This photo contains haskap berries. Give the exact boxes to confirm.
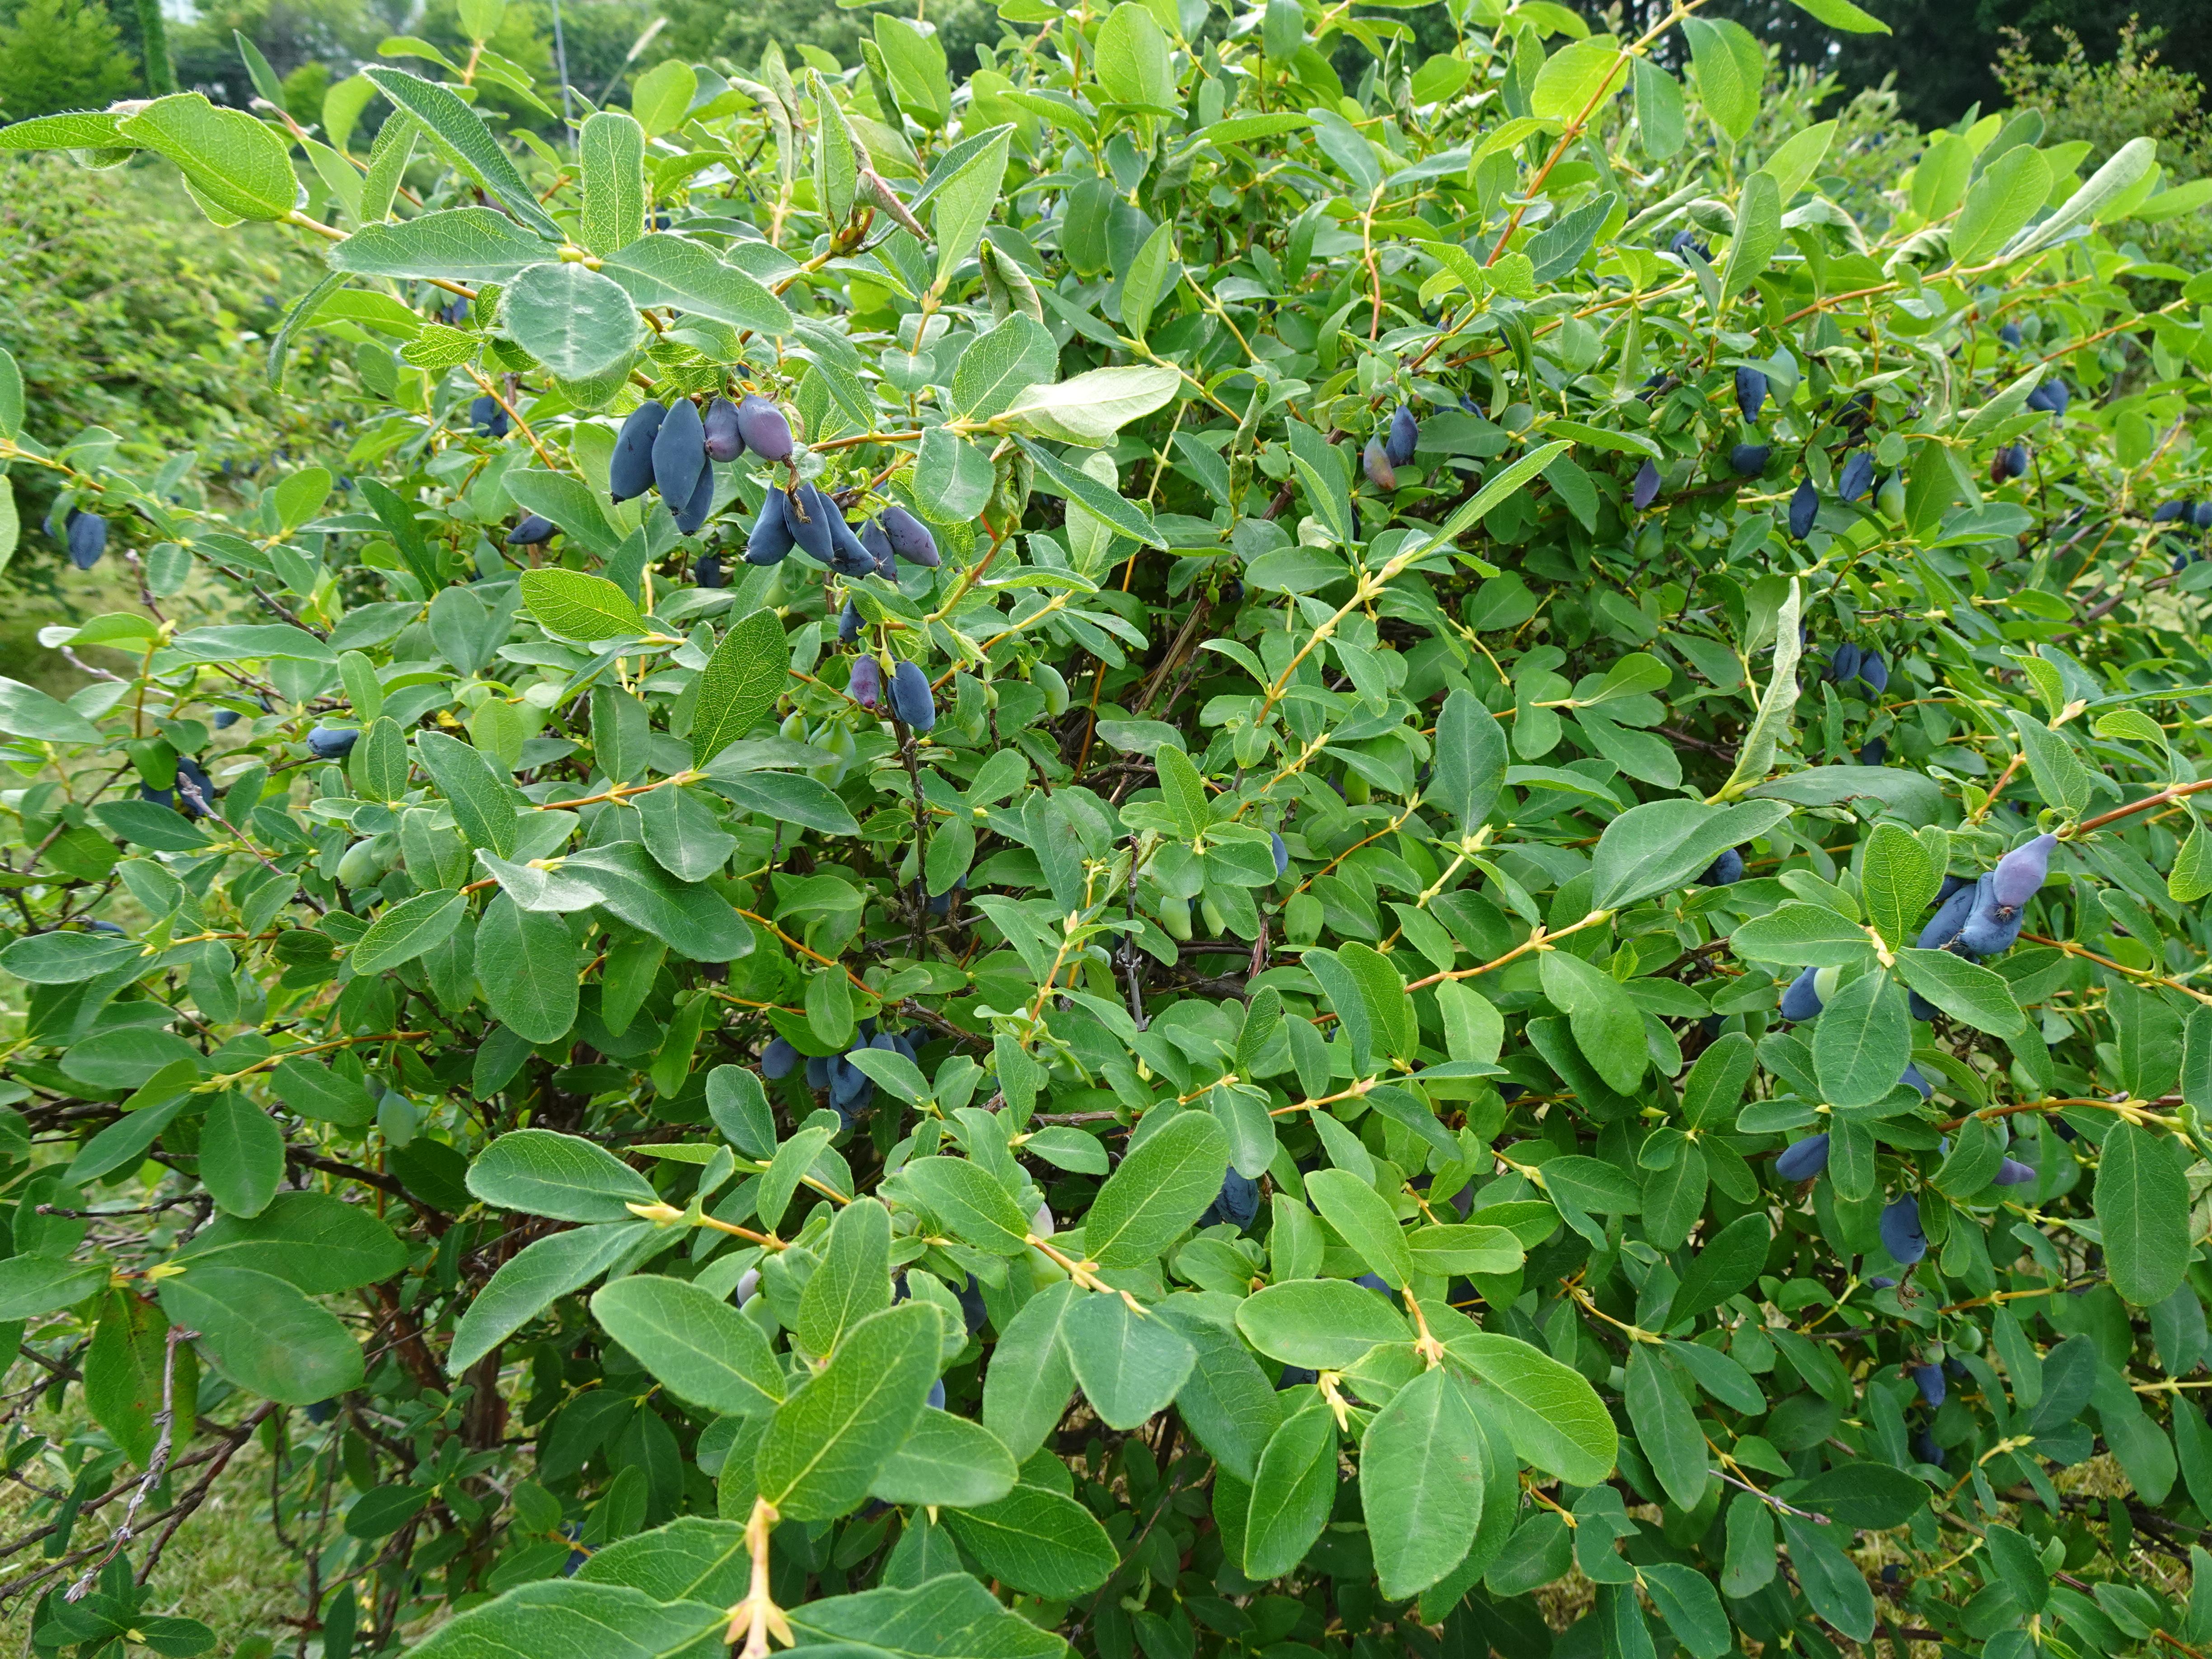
[892,1036,918,1068]
[1857,648,1888,699]
[1266,831,1290,872]
[1832,393,1875,427]
[1870,1278,1896,1292]
[894,661,935,731]
[1958,1322,1982,1351]
[2147,500,2182,524]
[2013,1060,2039,1092]
[174,759,218,820]
[761,1035,801,1082]
[1898,1063,1931,1100]
[1390,402,1425,466]
[676,458,715,536]
[310,727,356,760]
[1880,1564,1909,1585]
[1768,347,1799,410]
[1200,895,1228,937]
[1915,884,1978,952]
[812,720,831,744]
[921,887,952,917]
[2045,380,2070,415]
[1968,869,2028,953]
[966,715,986,743]
[738,1268,764,1304]
[1860,738,1886,765]
[1879,1187,1931,1261]
[471,398,492,426]
[1936,1137,1949,1152]
[1870,469,1903,509]
[1936,875,1964,899]
[1735,366,1767,422]
[479,409,507,438]
[829,1086,873,1130]
[1194,1201,1221,1230]
[1353,1268,1393,1305]
[85,922,129,943]
[1908,1428,1945,1468]
[1436,320,1446,329]
[1729,441,1773,479]
[561,1522,594,1573]
[950,875,968,892]
[1799,626,1807,646]
[808,722,857,790]
[1159,895,1195,942]
[1831,641,1861,688]
[1604,1365,1627,1391]
[1449,1184,1473,1221]
[215,709,243,730]
[71,513,107,573]
[927,1376,944,1412]
[838,600,866,642]
[1910,1362,1946,1410]
[953,1273,985,1336]
[2021,316,2043,344]
[860,1015,877,1040]
[1639,374,1668,400]
[1837,453,1877,505]
[1910,985,1940,1019]
[1771,1130,1839,1182]
[1961,951,1979,967]
[1459,393,1485,422]
[1790,471,1823,538]
[1822,399,1833,412]
[2004,321,2021,350]
[745,479,796,564]
[1944,1355,1970,1378]
[1707,845,1745,887]
[1990,446,2007,486]
[708,392,745,461]
[860,520,899,583]
[741,393,794,462]
[2006,443,2028,477]
[787,475,836,563]
[1993,1156,2035,1184]
[780,713,809,746]
[142,776,174,808]
[2026,386,2056,413]
[906,1023,931,1050]
[2172,550,2202,574]
[364,1072,383,1101]
[736,365,751,378]
[881,501,946,566]
[828,1029,870,1104]
[507,511,557,546]
[1358,431,1398,493]
[890,1279,909,1307]
[805,1057,828,1091]
[850,651,880,710]
[1875,466,1909,523]
[1278,1361,1317,1393]
[985,683,999,709]
[2194,501,2212,530]
[603,393,662,508]
[336,837,384,892]
[1212,1160,1256,1228]
[692,552,722,592]
[653,397,704,519]
[2181,498,2197,523]
[1998,833,2060,909]
[738,1293,781,1346]
[869,1032,895,1052]
[1434,404,1453,416]
[1779,967,1824,1021]
[888,678,903,720]
[809,490,878,576]
[1629,457,1672,513]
